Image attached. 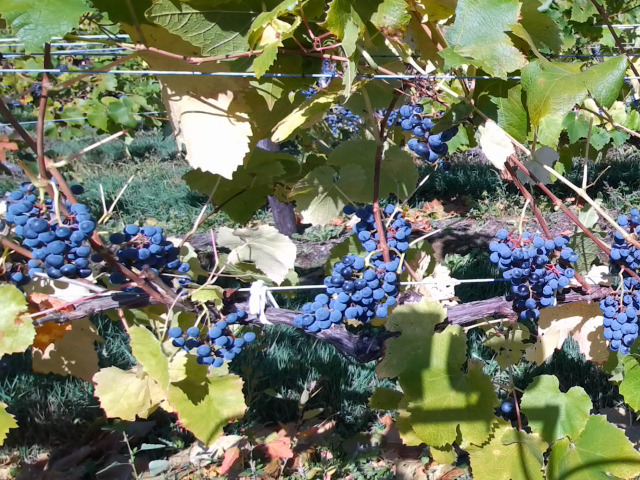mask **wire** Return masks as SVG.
<instances>
[{
	"label": "wire",
	"mask_w": 640,
	"mask_h": 480,
	"mask_svg": "<svg viewBox=\"0 0 640 480\" xmlns=\"http://www.w3.org/2000/svg\"><path fill=\"white\" fill-rule=\"evenodd\" d=\"M359 79L380 78V79H409L417 78L422 80H460V81H483L490 79V74L481 76H462V75H424L419 73L407 74H382V73H363L358 75Z\"/></svg>",
	"instance_id": "a73af890"
},
{
	"label": "wire",
	"mask_w": 640,
	"mask_h": 480,
	"mask_svg": "<svg viewBox=\"0 0 640 480\" xmlns=\"http://www.w3.org/2000/svg\"><path fill=\"white\" fill-rule=\"evenodd\" d=\"M63 74V75H90V74H118V75H203V76H226V77H251L255 75L254 71L248 72H228V71H204V70H121V69H88V70H65V69H23L8 68L0 69V74Z\"/></svg>",
	"instance_id": "d2f4af69"
},
{
	"label": "wire",
	"mask_w": 640,
	"mask_h": 480,
	"mask_svg": "<svg viewBox=\"0 0 640 480\" xmlns=\"http://www.w3.org/2000/svg\"><path fill=\"white\" fill-rule=\"evenodd\" d=\"M325 290L326 289V285L322 284V285H293V284H284L282 286L279 287H275V286H267L266 290L267 291H273V292H281L284 290Z\"/></svg>",
	"instance_id": "f0478fcc"
},
{
	"label": "wire",
	"mask_w": 640,
	"mask_h": 480,
	"mask_svg": "<svg viewBox=\"0 0 640 480\" xmlns=\"http://www.w3.org/2000/svg\"><path fill=\"white\" fill-rule=\"evenodd\" d=\"M502 277L498 278H469V279H433L418 281H396V286H421L435 284H471V283H501Z\"/></svg>",
	"instance_id": "4f2155b8"
}]
</instances>
